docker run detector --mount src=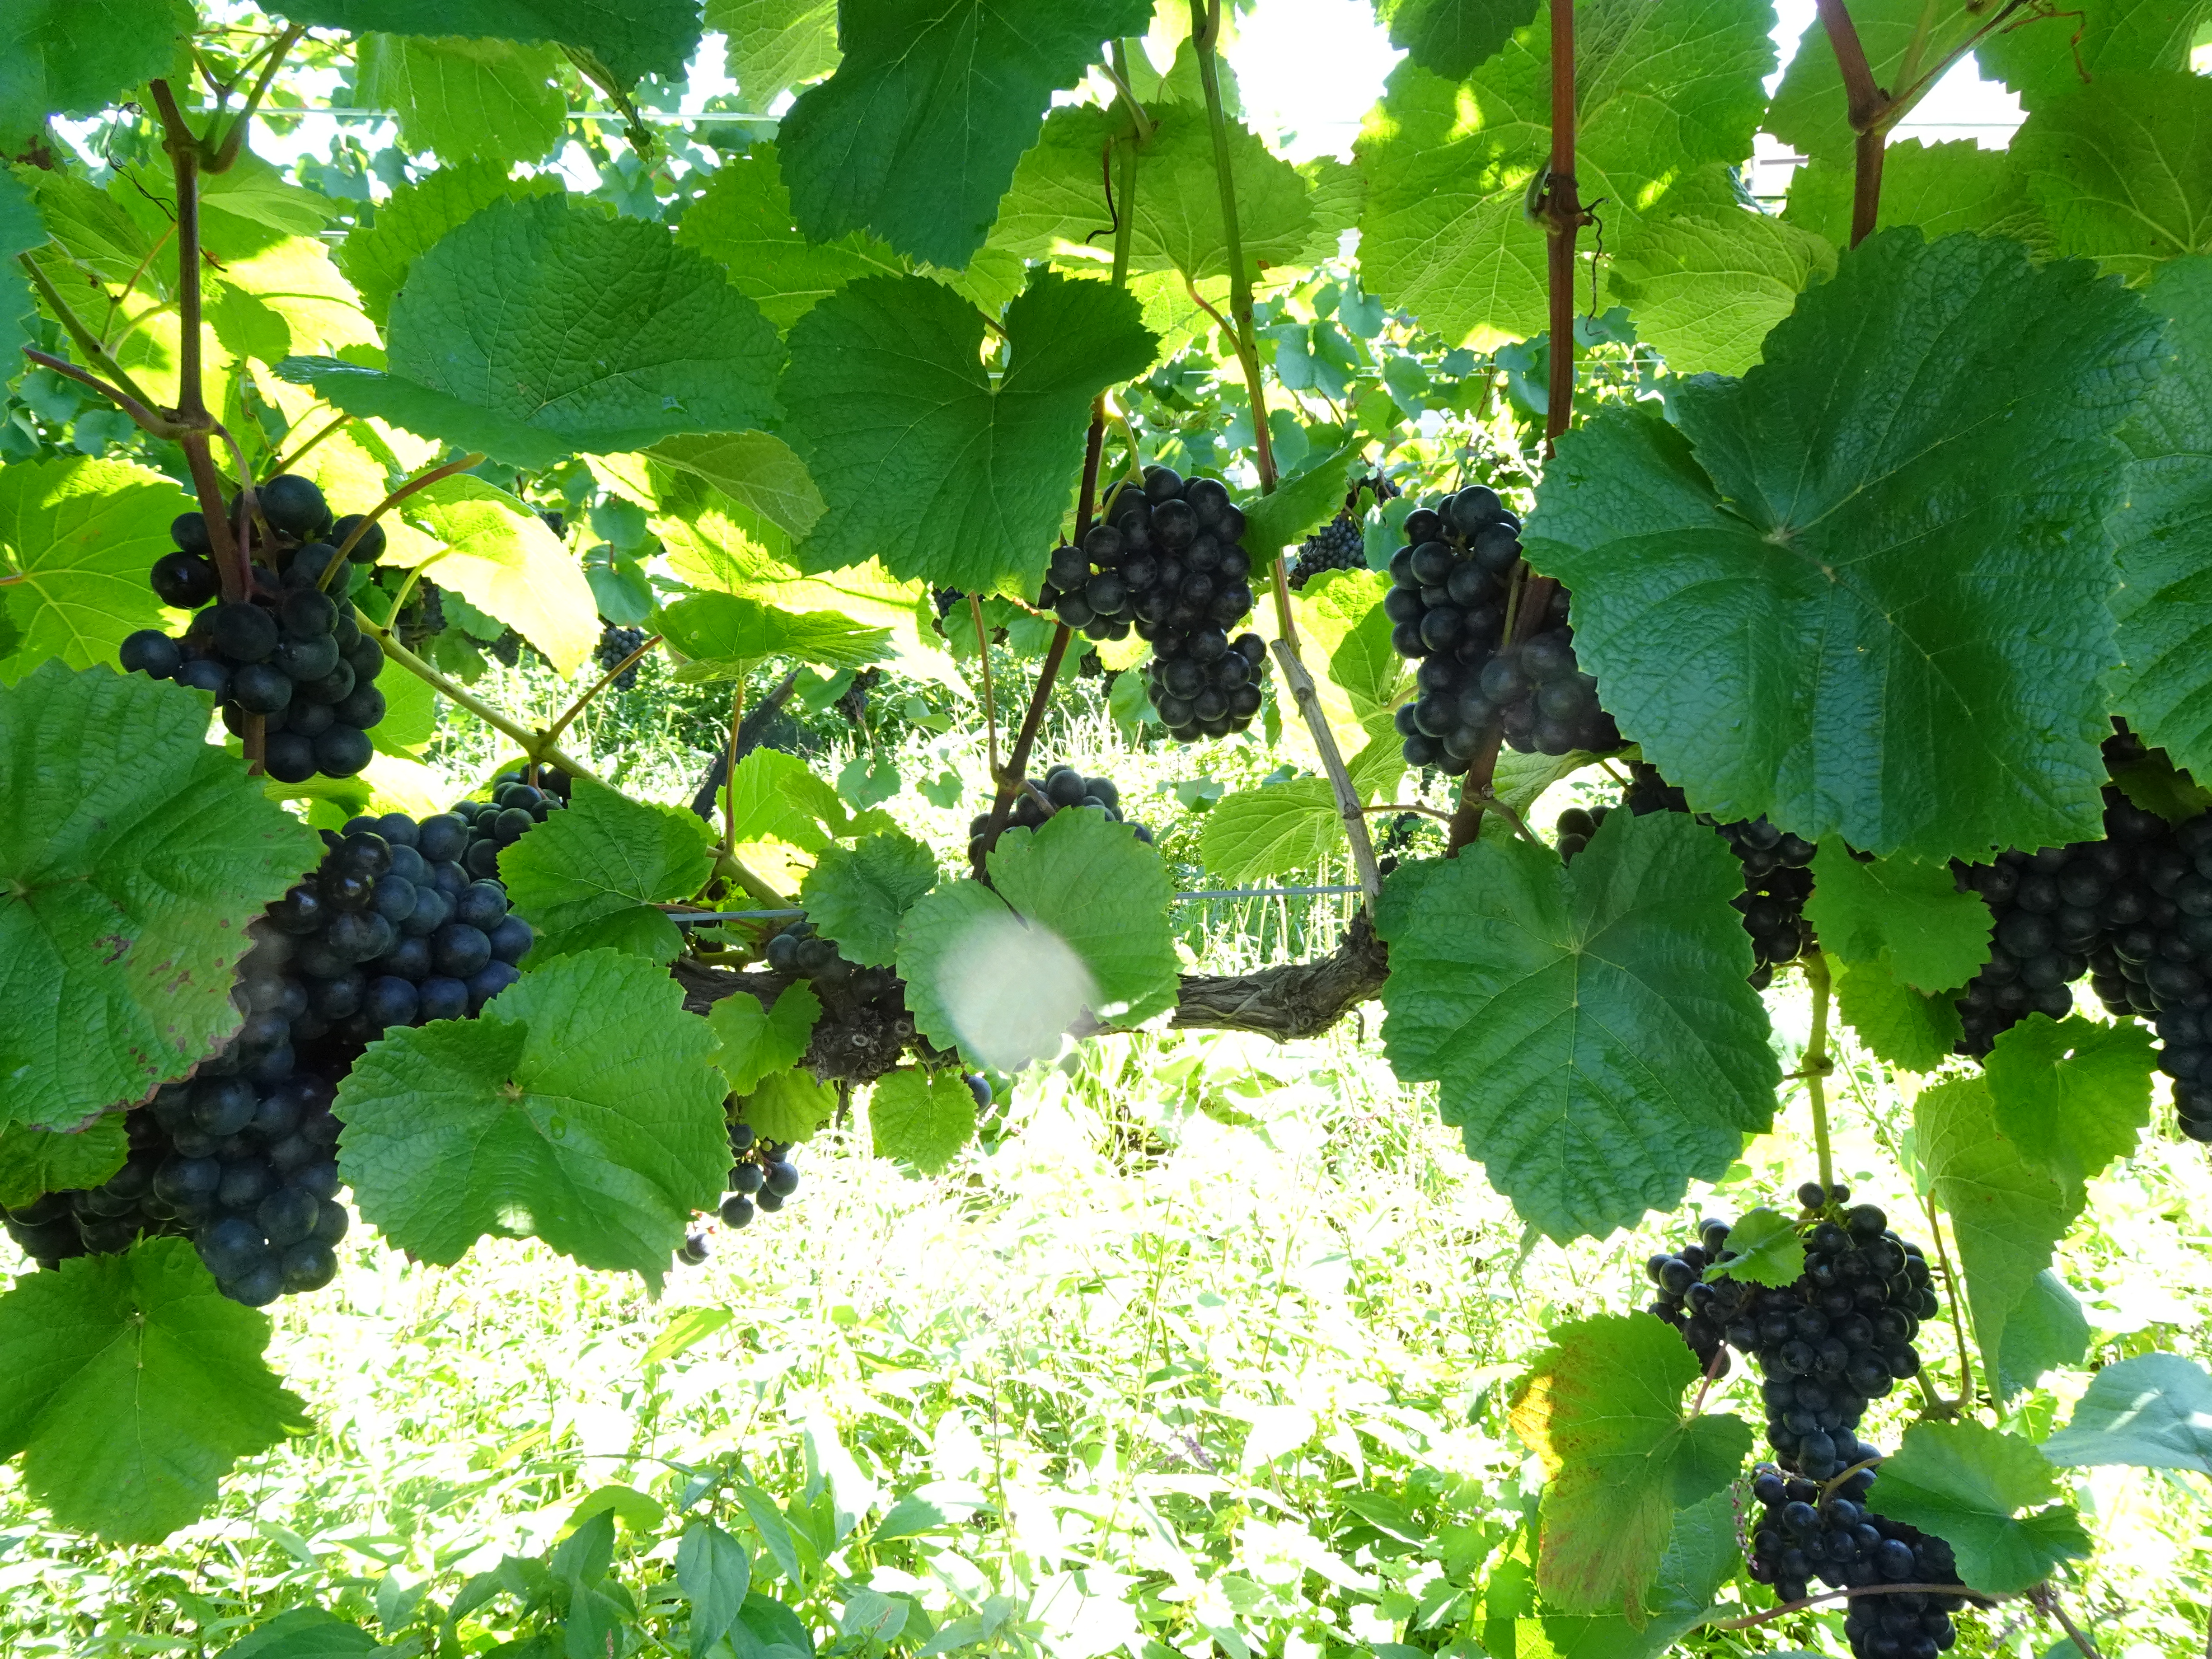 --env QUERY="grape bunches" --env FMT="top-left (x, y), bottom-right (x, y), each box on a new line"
top-left (1554, 805), bottom-right (1612, 868)
top-left (2083, 807), bottom-right (2212, 1143)
top-left (1728, 864), bottom-right (1820, 990)
top-left (0, 1105), bottom-right (198, 1272)
top-left (1747, 1463), bottom-right (1857, 1602)
top-left (1047, 466), bottom-right (1267, 742)
top-left (591, 622), bottom-right (649, 694)
top-left (767, 921), bottom-right (993, 1114)
top-left (1753, 1182), bottom-right (1937, 1480)
top-left (677, 1123), bottom-right (797, 1265)
top-left (450, 764), bottom-right (575, 882)
top-left (291, 1025), bottom-right (383, 1081)
top-left (1385, 484), bottom-right (1572, 775)
top-left (1012, 1032), bottom-right (1062, 1073)
top-left (120, 475), bottom-right (385, 783)
top-left (153, 915), bottom-right (347, 1308)
top-left (1482, 629), bottom-right (1637, 754)
top-left (1948, 785), bottom-right (2166, 1068)
top-left (1816, 1445), bottom-right (1989, 1659)
top-left (2088, 927), bottom-right (2163, 1022)
top-left (1618, 734), bottom-right (1691, 818)
top-left (267, 810), bottom-right (532, 1028)
top-left (1291, 512), bottom-right (1369, 589)
top-left (1697, 813), bottom-right (1817, 876)
top-left (968, 765), bottom-right (1154, 892)
top-left (1645, 1208), bottom-right (1779, 1379)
